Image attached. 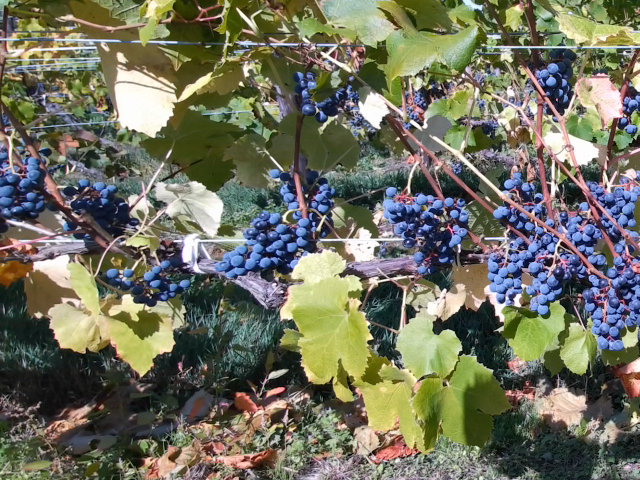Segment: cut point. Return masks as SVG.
<instances>
[{
  "label": "cut point",
  "instance_id": "6a23745f",
  "mask_svg": "<svg viewBox=\"0 0 640 480\" xmlns=\"http://www.w3.org/2000/svg\"><path fill=\"white\" fill-rule=\"evenodd\" d=\"M9 141L10 147H9V162H12V151H13V147H14V141L13 138L10 137L9 135H5Z\"/></svg>",
  "mask_w": 640,
  "mask_h": 480
},
{
  "label": "cut point",
  "instance_id": "7d7e1d6f",
  "mask_svg": "<svg viewBox=\"0 0 640 480\" xmlns=\"http://www.w3.org/2000/svg\"><path fill=\"white\" fill-rule=\"evenodd\" d=\"M416 167H417V165L414 163V165L412 166V168H411V170L409 172V177H408V180H407V184H411L412 175H413Z\"/></svg>",
  "mask_w": 640,
  "mask_h": 480
},
{
  "label": "cut point",
  "instance_id": "deb38ca7",
  "mask_svg": "<svg viewBox=\"0 0 640 480\" xmlns=\"http://www.w3.org/2000/svg\"><path fill=\"white\" fill-rule=\"evenodd\" d=\"M296 211H301L300 208H292V209H286L285 213L283 214V218H286L288 216V214H290L291 212H296Z\"/></svg>",
  "mask_w": 640,
  "mask_h": 480
},
{
  "label": "cut point",
  "instance_id": "40658cd0",
  "mask_svg": "<svg viewBox=\"0 0 640 480\" xmlns=\"http://www.w3.org/2000/svg\"><path fill=\"white\" fill-rule=\"evenodd\" d=\"M561 243H562V242L559 240V241H558V243H557V245H556V247L554 248L553 259H556L557 251H558L559 246L561 245Z\"/></svg>",
  "mask_w": 640,
  "mask_h": 480
}]
</instances>
